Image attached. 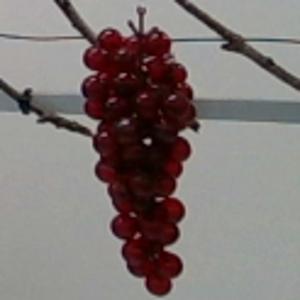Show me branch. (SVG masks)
Instances as JSON below:
<instances>
[{
    "label": "branch",
    "instance_id": "1",
    "mask_svg": "<svg viewBox=\"0 0 300 300\" xmlns=\"http://www.w3.org/2000/svg\"><path fill=\"white\" fill-rule=\"evenodd\" d=\"M177 6L184 10L188 15L196 19L215 35L224 39L225 43L218 46L219 50L242 56L252 64L258 66L280 83L289 86L300 94V78L277 64L273 57L264 55L256 48H253L241 33L231 30L230 27L223 25L211 14L203 11L191 0H172Z\"/></svg>",
    "mask_w": 300,
    "mask_h": 300
},
{
    "label": "branch",
    "instance_id": "2",
    "mask_svg": "<svg viewBox=\"0 0 300 300\" xmlns=\"http://www.w3.org/2000/svg\"><path fill=\"white\" fill-rule=\"evenodd\" d=\"M0 91L10 97L18 104V110L22 116H30L32 113L37 116L36 125H45L49 123L55 129H61L73 134L93 139L95 133L85 125L76 120H70L43 110L33 104V88L25 87L21 92L15 89L11 84L0 76Z\"/></svg>",
    "mask_w": 300,
    "mask_h": 300
},
{
    "label": "branch",
    "instance_id": "3",
    "mask_svg": "<svg viewBox=\"0 0 300 300\" xmlns=\"http://www.w3.org/2000/svg\"><path fill=\"white\" fill-rule=\"evenodd\" d=\"M53 5L65 17L70 27L76 31L81 37H84L86 42L91 46L95 45L96 34L93 29L84 21L72 4V0H51Z\"/></svg>",
    "mask_w": 300,
    "mask_h": 300
},
{
    "label": "branch",
    "instance_id": "4",
    "mask_svg": "<svg viewBox=\"0 0 300 300\" xmlns=\"http://www.w3.org/2000/svg\"><path fill=\"white\" fill-rule=\"evenodd\" d=\"M202 128V124L199 121H196L194 125L186 128L192 131L194 134H198L199 130Z\"/></svg>",
    "mask_w": 300,
    "mask_h": 300
}]
</instances>
